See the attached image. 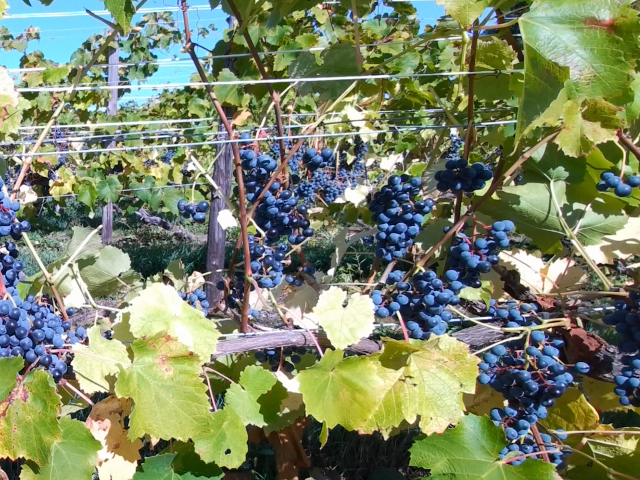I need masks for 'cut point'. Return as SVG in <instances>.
<instances>
[{
  "mask_svg": "<svg viewBox=\"0 0 640 480\" xmlns=\"http://www.w3.org/2000/svg\"><path fill=\"white\" fill-rule=\"evenodd\" d=\"M274 99L271 100V102L269 103V105L266 107V109L263 112V115L261 116V120H260V125L264 126L266 123V119L268 117V114L270 113V111L274 108Z\"/></svg>",
  "mask_w": 640,
  "mask_h": 480,
  "instance_id": "obj_1",
  "label": "cut point"
},
{
  "mask_svg": "<svg viewBox=\"0 0 640 480\" xmlns=\"http://www.w3.org/2000/svg\"><path fill=\"white\" fill-rule=\"evenodd\" d=\"M471 127L472 125L469 124V121H467V126H466V130H465V134H464V138H463V147L465 150L469 149V137H470V131H471Z\"/></svg>",
  "mask_w": 640,
  "mask_h": 480,
  "instance_id": "obj_2",
  "label": "cut point"
},
{
  "mask_svg": "<svg viewBox=\"0 0 640 480\" xmlns=\"http://www.w3.org/2000/svg\"><path fill=\"white\" fill-rule=\"evenodd\" d=\"M250 222L259 231L260 238L264 239L265 238V232H264V229L262 228V226L255 220V218L253 216L251 217Z\"/></svg>",
  "mask_w": 640,
  "mask_h": 480,
  "instance_id": "obj_3",
  "label": "cut point"
},
{
  "mask_svg": "<svg viewBox=\"0 0 640 480\" xmlns=\"http://www.w3.org/2000/svg\"><path fill=\"white\" fill-rule=\"evenodd\" d=\"M4 295L6 296L7 300H10L13 304V306H18V304L15 302L14 298L11 296L10 293H8L7 291L4 292Z\"/></svg>",
  "mask_w": 640,
  "mask_h": 480,
  "instance_id": "obj_4",
  "label": "cut point"
},
{
  "mask_svg": "<svg viewBox=\"0 0 640 480\" xmlns=\"http://www.w3.org/2000/svg\"><path fill=\"white\" fill-rule=\"evenodd\" d=\"M198 177H200V175H199V174H196V175L194 176V178H193L191 194H194V192H195V183H196V181H197Z\"/></svg>",
  "mask_w": 640,
  "mask_h": 480,
  "instance_id": "obj_5",
  "label": "cut point"
}]
</instances>
